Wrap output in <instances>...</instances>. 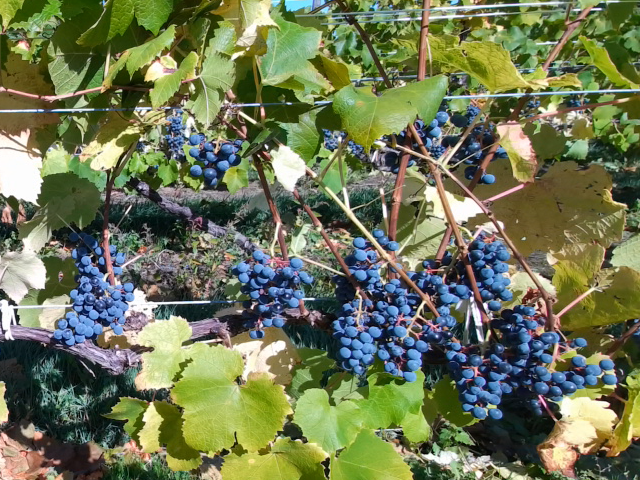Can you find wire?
<instances>
[{
  "mask_svg": "<svg viewBox=\"0 0 640 480\" xmlns=\"http://www.w3.org/2000/svg\"><path fill=\"white\" fill-rule=\"evenodd\" d=\"M639 88H587L573 89L562 91H533L528 93H469L445 96V101L471 98H530L535 96H569L575 94L603 93V94H619V93H639Z\"/></svg>",
  "mask_w": 640,
  "mask_h": 480,
  "instance_id": "1",
  "label": "wire"
},
{
  "mask_svg": "<svg viewBox=\"0 0 640 480\" xmlns=\"http://www.w3.org/2000/svg\"><path fill=\"white\" fill-rule=\"evenodd\" d=\"M152 105H134V106H113L110 108L103 107H58V108H0L1 114L7 113H60V112H101L113 113L116 111H136V110H152Z\"/></svg>",
  "mask_w": 640,
  "mask_h": 480,
  "instance_id": "2",
  "label": "wire"
},
{
  "mask_svg": "<svg viewBox=\"0 0 640 480\" xmlns=\"http://www.w3.org/2000/svg\"><path fill=\"white\" fill-rule=\"evenodd\" d=\"M304 106V101H288V100H273V101H258V102H238V103H224L221 105L222 109L226 108H240V107H261V106Z\"/></svg>",
  "mask_w": 640,
  "mask_h": 480,
  "instance_id": "4",
  "label": "wire"
},
{
  "mask_svg": "<svg viewBox=\"0 0 640 480\" xmlns=\"http://www.w3.org/2000/svg\"><path fill=\"white\" fill-rule=\"evenodd\" d=\"M232 304L239 305L241 303L257 304V299L239 298L235 299H199V300H164L160 302H130V307H162L166 305H201V304Z\"/></svg>",
  "mask_w": 640,
  "mask_h": 480,
  "instance_id": "3",
  "label": "wire"
}]
</instances>
